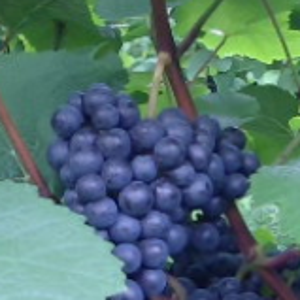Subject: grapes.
<instances>
[{"label":"grapes","mask_w":300,"mask_h":300,"mask_svg":"<svg viewBox=\"0 0 300 300\" xmlns=\"http://www.w3.org/2000/svg\"><path fill=\"white\" fill-rule=\"evenodd\" d=\"M58 134L46 149L60 172L64 203L111 239L126 265L128 293L113 300H158L166 261L192 242L213 251L223 212L261 166L246 133L212 115L191 122L178 107L141 121L136 102L106 83L75 90L52 114Z\"/></svg>","instance_id":"1"}]
</instances>
